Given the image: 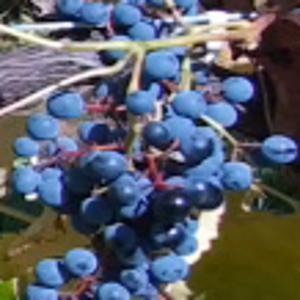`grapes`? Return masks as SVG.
<instances>
[{
  "mask_svg": "<svg viewBox=\"0 0 300 300\" xmlns=\"http://www.w3.org/2000/svg\"><path fill=\"white\" fill-rule=\"evenodd\" d=\"M143 90L111 94L109 79L88 93L60 90L46 100V112L24 120L27 136L12 144L18 165L9 185L19 196L38 193L47 208L76 201L73 228L95 236L121 267L117 279L92 283L84 300H152L159 284H183L190 268L183 258L200 247L196 209L213 212L224 193H247L252 167L227 161L220 140L236 129L259 92L254 77L227 76L222 100L208 102L197 90L209 83L202 62L191 65L193 84L183 77L175 51L145 55Z\"/></svg>",
  "mask_w": 300,
  "mask_h": 300,
  "instance_id": "1",
  "label": "grapes"
},
{
  "mask_svg": "<svg viewBox=\"0 0 300 300\" xmlns=\"http://www.w3.org/2000/svg\"><path fill=\"white\" fill-rule=\"evenodd\" d=\"M59 12L80 21L111 19L112 27L123 34L110 41L147 42L162 39L167 32L165 20L153 17L144 6L163 8L166 0H126L109 4L105 0H57Z\"/></svg>",
  "mask_w": 300,
  "mask_h": 300,
  "instance_id": "2",
  "label": "grapes"
},
{
  "mask_svg": "<svg viewBox=\"0 0 300 300\" xmlns=\"http://www.w3.org/2000/svg\"><path fill=\"white\" fill-rule=\"evenodd\" d=\"M98 254L85 247H76L67 252L62 259L43 260L33 269L37 284L26 289L31 300H57L61 289L69 286L72 281H81L93 277L99 267Z\"/></svg>",
  "mask_w": 300,
  "mask_h": 300,
  "instance_id": "3",
  "label": "grapes"
},
{
  "mask_svg": "<svg viewBox=\"0 0 300 300\" xmlns=\"http://www.w3.org/2000/svg\"><path fill=\"white\" fill-rule=\"evenodd\" d=\"M259 152L272 164L293 166L300 162V140L286 133L267 135L259 144Z\"/></svg>",
  "mask_w": 300,
  "mask_h": 300,
  "instance_id": "4",
  "label": "grapes"
}]
</instances>
